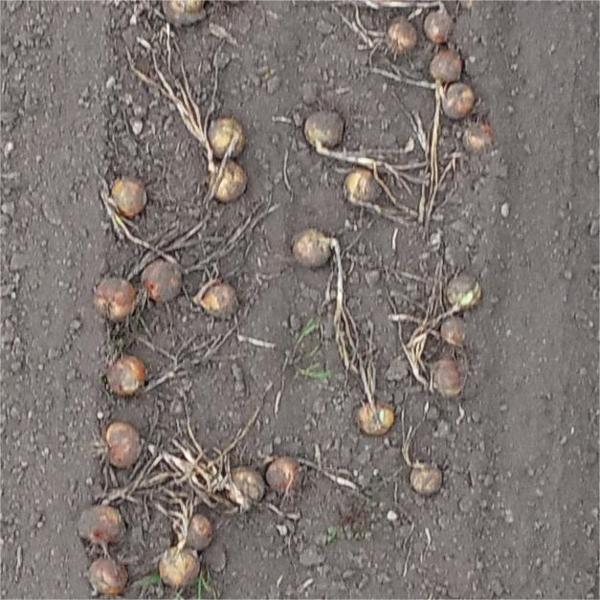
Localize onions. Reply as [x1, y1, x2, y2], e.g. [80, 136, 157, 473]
[292, 229, 332, 267]
[77, 503, 121, 544]
[162, 0, 204, 24]
[183, 517, 213, 549]
[443, 275, 479, 310]
[266, 455, 298, 491]
[355, 399, 395, 433]
[429, 48, 462, 80]
[200, 281, 236, 318]
[106, 353, 146, 393]
[88, 556, 125, 591]
[157, 547, 198, 585]
[439, 317, 467, 345]
[140, 260, 181, 301]
[228, 466, 265, 503]
[430, 359, 463, 396]
[102, 422, 140, 468]
[341, 167, 377, 203]
[420, 8, 452, 41]
[93, 276, 132, 318]
[409, 463, 441, 493]
[111, 180, 148, 216]
[303, 110, 342, 148]
[440, 82, 475, 117]
[462, 122, 493, 153]
[209, 162, 245, 200]
[384, 19, 416, 52]
[207, 117, 245, 156]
